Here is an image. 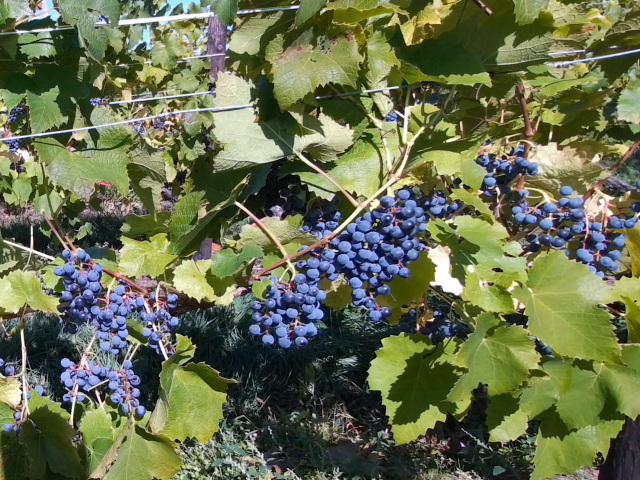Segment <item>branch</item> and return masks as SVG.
<instances>
[{
	"instance_id": "obj_4",
	"label": "branch",
	"mask_w": 640,
	"mask_h": 480,
	"mask_svg": "<svg viewBox=\"0 0 640 480\" xmlns=\"http://www.w3.org/2000/svg\"><path fill=\"white\" fill-rule=\"evenodd\" d=\"M102 271H103V273H104L105 275H108V276H111V277L118 278V279H120L121 281H124V282L128 283L130 286H132L133 288H135V289H136V290H138V291H141V292H142V293H144V294H147V293H148V289H147V288H145V287H143V286H141V285L137 284L136 282L132 281V280H131L129 277H127V276H124V275H122V274H120V273H118V272L110 271V270H108L106 267H103V268H102Z\"/></svg>"
},
{
	"instance_id": "obj_2",
	"label": "branch",
	"mask_w": 640,
	"mask_h": 480,
	"mask_svg": "<svg viewBox=\"0 0 640 480\" xmlns=\"http://www.w3.org/2000/svg\"><path fill=\"white\" fill-rule=\"evenodd\" d=\"M523 85L521 83H517L515 85V91H516V95H517V101H518V105L523 117V123H524V127L526 128V136H525V142L526 144V148L524 150V157L528 158L529 154L531 152V147H532V139H533V125L531 124V120H530V115H529V111L527 109L526 106V102L524 99V93H523Z\"/></svg>"
},
{
	"instance_id": "obj_5",
	"label": "branch",
	"mask_w": 640,
	"mask_h": 480,
	"mask_svg": "<svg viewBox=\"0 0 640 480\" xmlns=\"http://www.w3.org/2000/svg\"><path fill=\"white\" fill-rule=\"evenodd\" d=\"M537 227H538V223L534 222L530 226H528L526 229L521 231L519 234H517L518 225L516 223H512L511 224V228H510L509 240L510 241H513V240L514 241H518L519 239L523 238L525 235H527L528 233H530L531 231H533Z\"/></svg>"
},
{
	"instance_id": "obj_7",
	"label": "branch",
	"mask_w": 640,
	"mask_h": 480,
	"mask_svg": "<svg viewBox=\"0 0 640 480\" xmlns=\"http://www.w3.org/2000/svg\"><path fill=\"white\" fill-rule=\"evenodd\" d=\"M604 184H605V181H604V180H599V181L597 182V184L592 185V186L588 189V191L583 195V199H584V200H587V199L592 195V193H593L596 189L602 190V189H603V185H604Z\"/></svg>"
},
{
	"instance_id": "obj_1",
	"label": "branch",
	"mask_w": 640,
	"mask_h": 480,
	"mask_svg": "<svg viewBox=\"0 0 640 480\" xmlns=\"http://www.w3.org/2000/svg\"><path fill=\"white\" fill-rule=\"evenodd\" d=\"M426 129L425 125H421L419 130L416 132V134L408 141V144L406 146L403 158L401 160V162L399 163V166L396 170V173L387 181L386 184H384L375 195H373L371 198H369L368 200H366L365 202H363L358 208H356L352 214L347 217L343 223L338 226L331 234H329L328 236L322 238L319 242H315L313 244H311L308 248H305L299 252H295V253H291L288 255L283 256L281 259H279L278 261H276L275 263H272L270 265H267L266 267L262 268L258 273H256L253 276H248L247 280L248 281H256L259 278H261L265 273H267L268 271L275 269L279 266H281L283 263H285L286 261L290 260V259H294V258H298L300 255L312 250L314 247H319L322 248V244L331 241L335 235L338 234V232H341L343 230V228L345 226H347L350 222H352L355 217L361 213L367 206L371 205L373 202H375L393 183L396 179H398L400 176L403 175V169L405 164L408 161L409 158V154L410 151L413 147V144L421 137V135L423 134L424 130Z\"/></svg>"
},
{
	"instance_id": "obj_6",
	"label": "branch",
	"mask_w": 640,
	"mask_h": 480,
	"mask_svg": "<svg viewBox=\"0 0 640 480\" xmlns=\"http://www.w3.org/2000/svg\"><path fill=\"white\" fill-rule=\"evenodd\" d=\"M526 179L525 175H521L514 184V191H513V204L517 205L518 201L522 200V197L518 195L519 193V189H523L524 188V180Z\"/></svg>"
},
{
	"instance_id": "obj_3",
	"label": "branch",
	"mask_w": 640,
	"mask_h": 480,
	"mask_svg": "<svg viewBox=\"0 0 640 480\" xmlns=\"http://www.w3.org/2000/svg\"><path fill=\"white\" fill-rule=\"evenodd\" d=\"M40 166H41V169H42V175H43V180H44L43 187H44V190H45V193H46L47 208H48V213H49V216L51 218V221H52L54 227L57 229V231L60 233V235L64 239L65 243L69 246L71 251L72 252H76L77 248L75 247L73 242L70 240V238L66 234L65 230L60 226V224L57 221V218H56L55 213L53 211L51 190H50L49 184L47 182L44 163L40 162Z\"/></svg>"
}]
</instances>
